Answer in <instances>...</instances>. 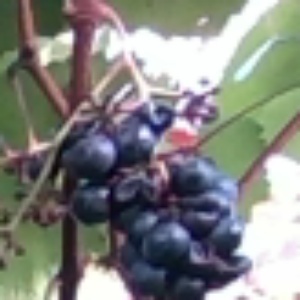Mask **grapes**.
<instances>
[{"label":"grapes","instance_id":"obj_1","mask_svg":"<svg viewBox=\"0 0 300 300\" xmlns=\"http://www.w3.org/2000/svg\"><path fill=\"white\" fill-rule=\"evenodd\" d=\"M174 109L123 117L107 131H75L62 142L60 159L75 177L72 214L82 224L110 219L126 234L119 274L137 300H204L248 272L247 254L231 255L245 228L232 216L240 184L197 150L154 160Z\"/></svg>","mask_w":300,"mask_h":300}]
</instances>
